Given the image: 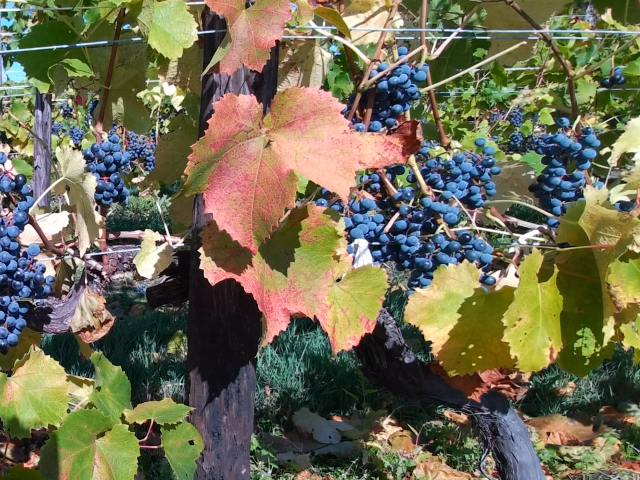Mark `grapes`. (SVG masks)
<instances>
[{"mask_svg": "<svg viewBox=\"0 0 640 480\" xmlns=\"http://www.w3.org/2000/svg\"><path fill=\"white\" fill-rule=\"evenodd\" d=\"M475 147H483L481 154L473 151L454 153L451 161L443 159H429L426 166L420 168V176L433 190L444 189L441 192L443 202H432L424 197L420 200L422 209H413L409 205H402L399 214L402 220L394 223L397 232H409L398 234L394 238L386 231L384 213L370 215L368 212L387 210L391 216L398 212L394 201L410 202L416 196V190L407 186L398 188L395 195L384 200H372L362 198L356 202L354 198L349 200V209L354 215L344 218L345 229L351 239H363L368 242H380L381 248L371 251L372 262L381 265L386 261L396 263L395 269L402 272L405 268L412 270L407 282L405 294L412 296L415 288L427 289L433 282V272L444 264L458 266L464 259L471 264L480 260V269L489 272L492 268L494 248L487 246L483 239L471 235L469 230H460L456 233V241L448 239L444 233L435 235L438 224L435 221L437 214L441 215L447 226L456 225L459 222L460 210L456 206H449L450 199L454 196L461 204L467 205L469 210L486 207L490 201L481 195V189L474 185L472 178L480 181L482 189L488 197L497 194L496 184L491 181L492 175L499 176L502 169L496 165V159L491 157L495 149L486 146L485 139L476 138L473 141ZM449 170L450 176L444 177L432 170Z\"/></svg>", "mask_w": 640, "mask_h": 480, "instance_id": "1", "label": "grapes"}, {"mask_svg": "<svg viewBox=\"0 0 640 480\" xmlns=\"http://www.w3.org/2000/svg\"><path fill=\"white\" fill-rule=\"evenodd\" d=\"M0 191L4 194L16 191L21 197L14 210L12 225L0 216V353L6 356L10 347L19 344L18 336L27 325L24 315L28 308L15 300L28 299L41 306L44 297L52 292L55 278L44 276L46 266L32 259L41 254L37 243L29 244L20 255L22 245L16 241L25 232L30 219L27 211L34 204L27 176L18 172L12 179L1 174Z\"/></svg>", "mask_w": 640, "mask_h": 480, "instance_id": "2", "label": "grapes"}, {"mask_svg": "<svg viewBox=\"0 0 640 480\" xmlns=\"http://www.w3.org/2000/svg\"><path fill=\"white\" fill-rule=\"evenodd\" d=\"M582 136L578 143H573L563 132L553 135H544L542 142L547 145L537 146L535 153L544 155L540 160L542 165L548 166L536 178L537 183H531L527 190L533 193L535 198H539L545 212L555 216H562L567 212L570 202H584L586 197L579 188L587 184L586 175L592 166V161L598 156V151L602 146V141L593 135L590 128L582 131ZM576 162L578 172L569 173L566 164Z\"/></svg>", "mask_w": 640, "mask_h": 480, "instance_id": "3", "label": "grapes"}, {"mask_svg": "<svg viewBox=\"0 0 640 480\" xmlns=\"http://www.w3.org/2000/svg\"><path fill=\"white\" fill-rule=\"evenodd\" d=\"M429 69L428 63H424L419 69L411 68V63L404 61L390 72V76H381L378 79L369 123L371 131L394 126L396 117L412 108L413 101L422 97L416 83L426 81V71Z\"/></svg>", "mask_w": 640, "mask_h": 480, "instance_id": "4", "label": "grapes"}, {"mask_svg": "<svg viewBox=\"0 0 640 480\" xmlns=\"http://www.w3.org/2000/svg\"><path fill=\"white\" fill-rule=\"evenodd\" d=\"M119 141L120 137L112 134L108 137V142H93L82 151V156L87 163L85 171L92 173L95 179L94 198L105 205L117 203L120 206H126L129 203L130 191L121 180L118 168L131 159V154L120 153Z\"/></svg>", "mask_w": 640, "mask_h": 480, "instance_id": "5", "label": "grapes"}, {"mask_svg": "<svg viewBox=\"0 0 640 480\" xmlns=\"http://www.w3.org/2000/svg\"><path fill=\"white\" fill-rule=\"evenodd\" d=\"M623 74L621 67H616L612 72V77L603 79L600 82L602 88H612L614 86H623L626 83V77Z\"/></svg>", "mask_w": 640, "mask_h": 480, "instance_id": "6", "label": "grapes"}, {"mask_svg": "<svg viewBox=\"0 0 640 480\" xmlns=\"http://www.w3.org/2000/svg\"><path fill=\"white\" fill-rule=\"evenodd\" d=\"M359 181L361 183L364 182H372V184L370 185V188L372 190H380L382 188V183H381V176L379 174H377L376 172H372L370 175L367 174H363L359 177Z\"/></svg>", "mask_w": 640, "mask_h": 480, "instance_id": "7", "label": "grapes"}, {"mask_svg": "<svg viewBox=\"0 0 640 480\" xmlns=\"http://www.w3.org/2000/svg\"><path fill=\"white\" fill-rule=\"evenodd\" d=\"M315 205L317 207H329L332 211L338 212V213H342L345 209V205L343 203H341L340 201H335L332 205L331 202L328 199H324V198H318L315 201Z\"/></svg>", "mask_w": 640, "mask_h": 480, "instance_id": "8", "label": "grapes"}, {"mask_svg": "<svg viewBox=\"0 0 640 480\" xmlns=\"http://www.w3.org/2000/svg\"><path fill=\"white\" fill-rule=\"evenodd\" d=\"M349 126L358 133H364L366 131V127L364 126V124L359 123V120L357 118H352L351 120H349Z\"/></svg>", "mask_w": 640, "mask_h": 480, "instance_id": "9", "label": "grapes"}, {"mask_svg": "<svg viewBox=\"0 0 640 480\" xmlns=\"http://www.w3.org/2000/svg\"><path fill=\"white\" fill-rule=\"evenodd\" d=\"M388 68H389V65L387 63H380L377 66L376 70H373L371 72L370 77L371 78H376L379 75V73H382L383 71H386Z\"/></svg>", "mask_w": 640, "mask_h": 480, "instance_id": "10", "label": "grapes"}]
</instances>
